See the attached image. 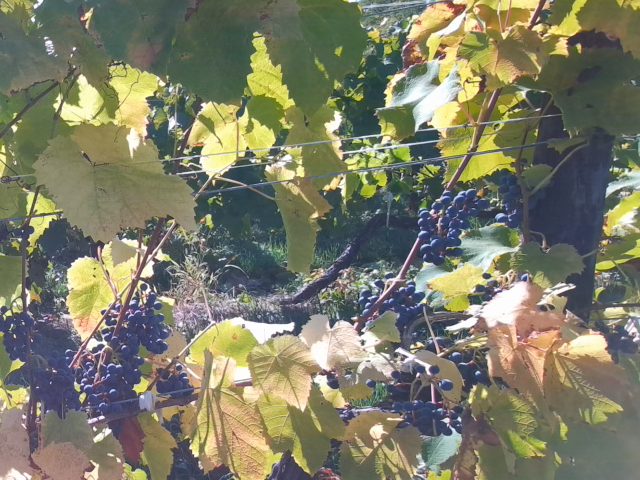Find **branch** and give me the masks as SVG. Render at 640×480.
<instances>
[{"instance_id":"branch-1","label":"branch","mask_w":640,"mask_h":480,"mask_svg":"<svg viewBox=\"0 0 640 480\" xmlns=\"http://www.w3.org/2000/svg\"><path fill=\"white\" fill-rule=\"evenodd\" d=\"M163 223L164 220L163 219H159L158 220V224L155 227V229L153 230L152 236L149 240V243L146 247V250L142 256L140 251L136 252L137 255V259H136V273L131 280H128L123 287L120 289V291L118 292V294L109 302L105 312L103 313V315L100 317V319L97 321L96 325L94 326V328H92L87 335L85 336L84 340L80 343L78 349L75 351L71 361L68 364L69 368H73L76 361L78 360L80 354L82 353L83 349L85 348L86 345L89 344V341L91 339V337L98 332V330L100 329V327L102 326V324L104 323V321L107 319V317L109 316L111 310L113 309L114 305L118 302V300H120L123 295L125 294V292L128 290V292L125 295L124 301H123V307L122 310L117 318V324L115 326V329L113 331V335L117 336L121 326H122V321L125 318V315L127 313V309H128V304L130 301L131 296L134 293V289L137 288L138 286V280L139 277L142 273V270L145 268V266H149L150 263L154 260L157 252L159 251V249L161 248V246L165 243V241L168 239V237L170 236V234L172 233V231L174 230L176 223L172 222L169 227L167 228L166 232L164 233V235L162 236V238L156 243L155 247L154 243L157 239L158 233L160 232L161 228L163 227Z\"/></svg>"},{"instance_id":"branch-2","label":"branch","mask_w":640,"mask_h":480,"mask_svg":"<svg viewBox=\"0 0 640 480\" xmlns=\"http://www.w3.org/2000/svg\"><path fill=\"white\" fill-rule=\"evenodd\" d=\"M421 244H422V241L420 239H416L414 241L412 248L410 249V251L406 255L404 263L402 264L398 274L395 277V282L391 281L388 284L387 289H385L382 292V294L376 299V301L370 307V310L368 311V313L365 314V315H362V316H360L358 318V320L354 324V328L356 330H359L365 324V322L370 321L375 316L378 308L389 297V295L392 293V291L399 285V283L404 278L406 272L408 271V268L410 267V265H411V263L413 261V258L415 257V255L419 251V248H420Z\"/></svg>"},{"instance_id":"branch-3","label":"branch","mask_w":640,"mask_h":480,"mask_svg":"<svg viewBox=\"0 0 640 480\" xmlns=\"http://www.w3.org/2000/svg\"><path fill=\"white\" fill-rule=\"evenodd\" d=\"M523 155V149H518V153L515 157V162L513 163V166L516 168V174H517V178L521 184V192H522V197H523V220H524V241L525 242H529L530 238H529V217H528V208H529V191H528V186L526 184V181L522 175L521 172V165H520V160L521 157Z\"/></svg>"},{"instance_id":"branch-4","label":"branch","mask_w":640,"mask_h":480,"mask_svg":"<svg viewBox=\"0 0 640 480\" xmlns=\"http://www.w3.org/2000/svg\"><path fill=\"white\" fill-rule=\"evenodd\" d=\"M246 160L269 161V160H276V157L275 156H261V155H243V156L235 157L228 164H226V165L222 166L221 168H219L217 172L212 173L207 178V180L204 182V184L199 188V191L203 190V189H207L209 187V185L211 184V182L214 180V178H216L221 173H224L225 171L230 169L232 165H236L238 162L246 161Z\"/></svg>"},{"instance_id":"branch-5","label":"branch","mask_w":640,"mask_h":480,"mask_svg":"<svg viewBox=\"0 0 640 480\" xmlns=\"http://www.w3.org/2000/svg\"><path fill=\"white\" fill-rule=\"evenodd\" d=\"M57 85H58V82L54 81L51 85H49L47 88L42 90L27 105H25L22 109H20L18 113L13 118H11L10 121L6 124V126L2 129V131L0 132V138H3L6 135L9 129L15 124V122H17L22 117L23 114L27 112L28 109H31L38 101L41 100L43 96H45L50 91L55 89Z\"/></svg>"},{"instance_id":"branch-6","label":"branch","mask_w":640,"mask_h":480,"mask_svg":"<svg viewBox=\"0 0 640 480\" xmlns=\"http://www.w3.org/2000/svg\"><path fill=\"white\" fill-rule=\"evenodd\" d=\"M77 79H78V75H77V74H74V75L71 77V79L69 80V83H68L67 89H66V91L64 92V94H63V96H62V98H61V100H60V102H59V104H58V107H57V110H56V114H55L54 120L52 121V124H51L50 129H49V137H50V138H53V137H54V132H55V129H56L57 123H58V122H59V120H60L61 113H62V109H63L64 104L66 103V101H67V99H68V97H69V95H70V93H71V91H72V89H73V85H74V83H75V81H76Z\"/></svg>"},{"instance_id":"branch-7","label":"branch","mask_w":640,"mask_h":480,"mask_svg":"<svg viewBox=\"0 0 640 480\" xmlns=\"http://www.w3.org/2000/svg\"><path fill=\"white\" fill-rule=\"evenodd\" d=\"M26 245H27V241L23 240L21 242V253H22V258H21V271H22L21 294H23V297H21V309H22L23 312L27 311V306H26V280H27V275H28V267L26 265V261H27Z\"/></svg>"},{"instance_id":"branch-8","label":"branch","mask_w":640,"mask_h":480,"mask_svg":"<svg viewBox=\"0 0 640 480\" xmlns=\"http://www.w3.org/2000/svg\"><path fill=\"white\" fill-rule=\"evenodd\" d=\"M26 336H27V341H26V350H27V360L29 363V372H28V381H29V385L31 389H35L36 385L34 382V378H33V374H34V361L32 358V330L31 329H27L26 330Z\"/></svg>"},{"instance_id":"branch-9","label":"branch","mask_w":640,"mask_h":480,"mask_svg":"<svg viewBox=\"0 0 640 480\" xmlns=\"http://www.w3.org/2000/svg\"><path fill=\"white\" fill-rule=\"evenodd\" d=\"M472 159H473V157H469V158H465V159L461 160V162L459 163L457 168L450 175V179H449V182L447 184V188L449 190H452L455 187L456 182L460 179L461 174L463 173L464 169L466 168V166L468 165V163Z\"/></svg>"},{"instance_id":"branch-10","label":"branch","mask_w":640,"mask_h":480,"mask_svg":"<svg viewBox=\"0 0 640 480\" xmlns=\"http://www.w3.org/2000/svg\"><path fill=\"white\" fill-rule=\"evenodd\" d=\"M500 94H501V90L499 88H496L493 91L492 96H491L490 100L488 101L486 109H485V111L483 113L482 120H489L490 119V116H491V114L493 112L494 106L497 103Z\"/></svg>"},{"instance_id":"branch-11","label":"branch","mask_w":640,"mask_h":480,"mask_svg":"<svg viewBox=\"0 0 640 480\" xmlns=\"http://www.w3.org/2000/svg\"><path fill=\"white\" fill-rule=\"evenodd\" d=\"M194 123H195V118L191 117L189 122H188V125H187L186 131L184 133V136H183V138L181 140V143H180V146H179V149H178V155H183V151L185 149L186 143L188 141V138L190 136V133L192 131Z\"/></svg>"},{"instance_id":"branch-12","label":"branch","mask_w":640,"mask_h":480,"mask_svg":"<svg viewBox=\"0 0 640 480\" xmlns=\"http://www.w3.org/2000/svg\"><path fill=\"white\" fill-rule=\"evenodd\" d=\"M39 194H40V187H39V186H36V187H35V191H34V195H33V198H32L31 204H30V208H29V212H28V217H27V218H25V224H26V225H29V224H30V220H31V218L33 217L34 210H35V207H36V203H37V200H38Z\"/></svg>"},{"instance_id":"branch-13","label":"branch","mask_w":640,"mask_h":480,"mask_svg":"<svg viewBox=\"0 0 640 480\" xmlns=\"http://www.w3.org/2000/svg\"><path fill=\"white\" fill-rule=\"evenodd\" d=\"M485 129H486V126H485V125H479V126H478V128L476 129L475 134H474V135H475V138H474V139H472L471 144H470V146H469V150H470V151H475V150L477 149L478 144H479V141H480V139H481V137L479 136V133H480V132H484V131H485Z\"/></svg>"},{"instance_id":"branch-14","label":"branch","mask_w":640,"mask_h":480,"mask_svg":"<svg viewBox=\"0 0 640 480\" xmlns=\"http://www.w3.org/2000/svg\"><path fill=\"white\" fill-rule=\"evenodd\" d=\"M112 349H113V343H112V342H109V343H108V346H107V348H106V352H105V354H104V356H103V363H104V364H107V363H108V359H109V357H110V354H111Z\"/></svg>"},{"instance_id":"branch-15","label":"branch","mask_w":640,"mask_h":480,"mask_svg":"<svg viewBox=\"0 0 640 480\" xmlns=\"http://www.w3.org/2000/svg\"><path fill=\"white\" fill-rule=\"evenodd\" d=\"M530 128H531V125H530V124H527V125L524 127L523 132H522V134H521V143H526V137H527V134H528V132H529Z\"/></svg>"}]
</instances>
